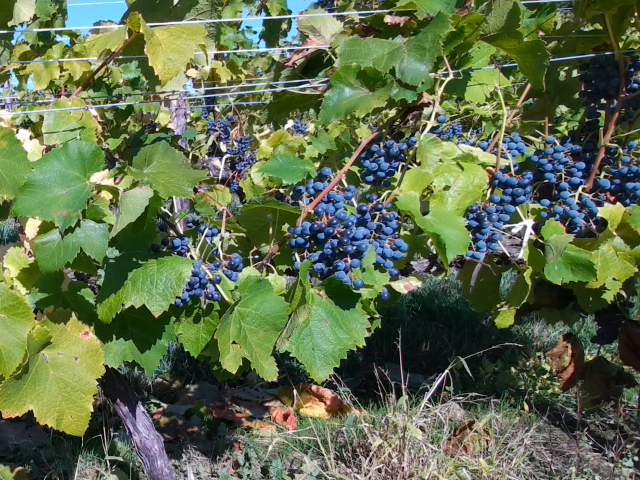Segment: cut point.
<instances>
[{
    "label": "cut point",
    "instance_id": "cut-point-1",
    "mask_svg": "<svg viewBox=\"0 0 640 480\" xmlns=\"http://www.w3.org/2000/svg\"><path fill=\"white\" fill-rule=\"evenodd\" d=\"M502 151H503L504 155L506 156V159H507V161L509 163L510 168H513L512 160L510 159L509 153L506 151L505 147L503 148Z\"/></svg>",
    "mask_w": 640,
    "mask_h": 480
}]
</instances>
